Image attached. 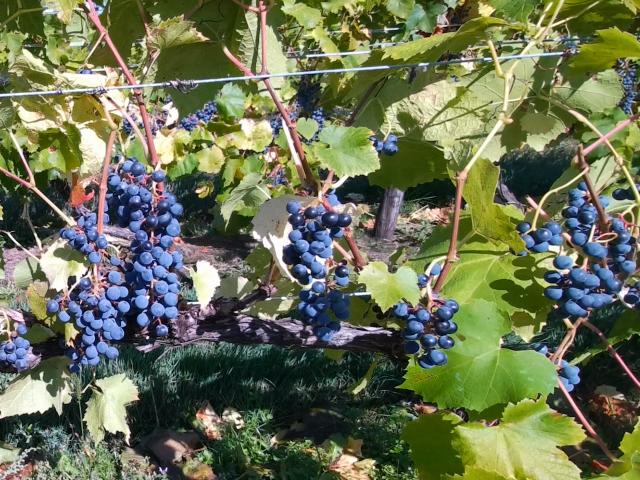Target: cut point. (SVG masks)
<instances>
[{
  "label": "cut point",
  "instance_id": "cut-point-3",
  "mask_svg": "<svg viewBox=\"0 0 640 480\" xmlns=\"http://www.w3.org/2000/svg\"><path fill=\"white\" fill-rule=\"evenodd\" d=\"M0 319H1L2 323H3V325H4V328L6 330H9L11 328V323H10V320H9L8 316L7 315H3V314L0 313Z\"/></svg>",
  "mask_w": 640,
  "mask_h": 480
},
{
  "label": "cut point",
  "instance_id": "cut-point-2",
  "mask_svg": "<svg viewBox=\"0 0 640 480\" xmlns=\"http://www.w3.org/2000/svg\"><path fill=\"white\" fill-rule=\"evenodd\" d=\"M451 259V256L449 254H441L440 256L430 260L426 266H425V271L427 273H430L433 269L434 266L441 264L443 261H449Z\"/></svg>",
  "mask_w": 640,
  "mask_h": 480
},
{
  "label": "cut point",
  "instance_id": "cut-point-1",
  "mask_svg": "<svg viewBox=\"0 0 640 480\" xmlns=\"http://www.w3.org/2000/svg\"><path fill=\"white\" fill-rule=\"evenodd\" d=\"M586 173H587V170L585 168H581L580 170H577L573 174V176L569 179V181L559 183L557 185H554L552 188L545 190L543 192L542 199L544 201H547L550 198V196L554 195L556 192H559L564 189H570L579 180V178L584 176Z\"/></svg>",
  "mask_w": 640,
  "mask_h": 480
}]
</instances>
